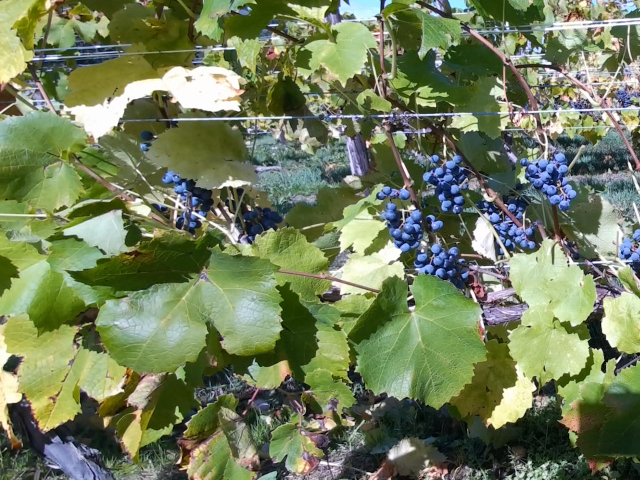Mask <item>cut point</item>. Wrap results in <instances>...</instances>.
Returning a JSON list of instances; mask_svg holds the SVG:
<instances>
[{
	"mask_svg": "<svg viewBox=\"0 0 640 480\" xmlns=\"http://www.w3.org/2000/svg\"><path fill=\"white\" fill-rule=\"evenodd\" d=\"M543 136L545 139V144L541 143L538 139V132H535V139L536 141L539 143V145L544 146L545 147V152L543 154V158H546L547 154H548V139H547V134L546 131H543Z\"/></svg>",
	"mask_w": 640,
	"mask_h": 480,
	"instance_id": "1",
	"label": "cut point"
}]
</instances>
